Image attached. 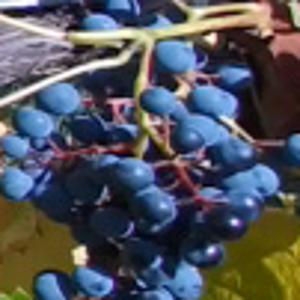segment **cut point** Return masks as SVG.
<instances>
[{
  "mask_svg": "<svg viewBox=\"0 0 300 300\" xmlns=\"http://www.w3.org/2000/svg\"><path fill=\"white\" fill-rule=\"evenodd\" d=\"M266 11V6L260 2L254 1H238L222 7H205L200 9H191L186 14V20L189 23H194L197 20L209 18H227L232 15L250 12L263 14Z\"/></svg>",
  "mask_w": 300,
  "mask_h": 300,
  "instance_id": "6a23745f",
  "label": "cut point"
},
{
  "mask_svg": "<svg viewBox=\"0 0 300 300\" xmlns=\"http://www.w3.org/2000/svg\"><path fill=\"white\" fill-rule=\"evenodd\" d=\"M153 43L145 40L141 44L139 59L135 71L134 89L137 92H143L146 89V75L152 55Z\"/></svg>",
  "mask_w": 300,
  "mask_h": 300,
  "instance_id": "7d7e1d6f",
  "label": "cut point"
}]
</instances>
